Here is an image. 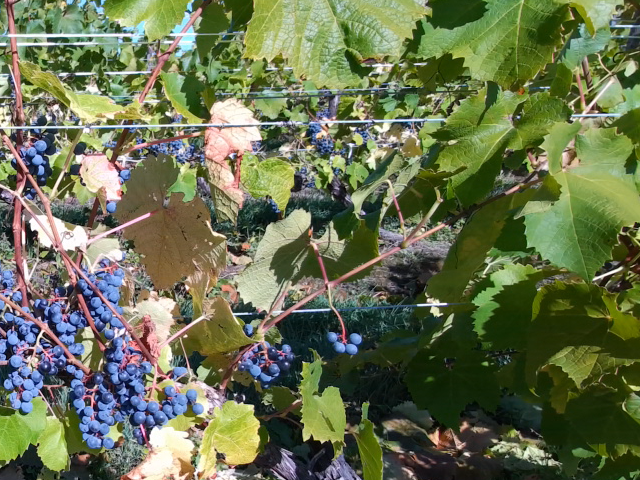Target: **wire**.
<instances>
[{
  "instance_id": "d2f4af69",
  "label": "wire",
  "mask_w": 640,
  "mask_h": 480,
  "mask_svg": "<svg viewBox=\"0 0 640 480\" xmlns=\"http://www.w3.org/2000/svg\"><path fill=\"white\" fill-rule=\"evenodd\" d=\"M445 116H435V117H421V118H371V119H361V120H350V119H331L326 121H302V120H290V121H272L266 123H252V122H212V123H204V122H181V123H171V124H161V123H153L149 124H109V125H100V124H82L77 126H23V127H0V130H26V129H65V130H73V129H118V130H128V129H173V128H183V127H202V128H215V127H250V128H268L274 126H292V125H300V126H328L333 124H348V125H363V124H373V123H391V124H399V123H411V124H421L423 122H438L445 121Z\"/></svg>"
},
{
  "instance_id": "a73af890",
  "label": "wire",
  "mask_w": 640,
  "mask_h": 480,
  "mask_svg": "<svg viewBox=\"0 0 640 480\" xmlns=\"http://www.w3.org/2000/svg\"><path fill=\"white\" fill-rule=\"evenodd\" d=\"M0 37L8 38H27V39H43V38H62V39H75V38H145V33H97V32H85V33H41V34H29V33H10L0 32Z\"/></svg>"
},
{
  "instance_id": "f0478fcc",
  "label": "wire",
  "mask_w": 640,
  "mask_h": 480,
  "mask_svg": "<svg viewBox=\"0 0 640 480\" xmlns=\"http://www.w3.org/2000/svg\"><path fill=\"white\" fill-rule=\"evenodd\" d=\"M147 41L137 42H120V41H91V42H79V41H56V42H18V47H30V48H45V47H59V46H77V47H93V46H118V47H139L147 46Z\"/></svg>"
},
{
  "instance_id": "4f2155b8",
  "label": "wire",
  "mask_w": 640,
  "mask_h": 480,
  "mask_svg": "<svg viewBox=\"0 0 640 480\" xmlns=\"http://www.w3.org/2000/svg\"><path fill=\"white\" fill-rule=\"evenodd\" d=\"M475 301H457V302H420V303H399L391 305H373V306H342L338 308L339 312L344 311H375V310H393L401 308H435V307H460L475 306Z\"/></svg>"
}]
</instances>
